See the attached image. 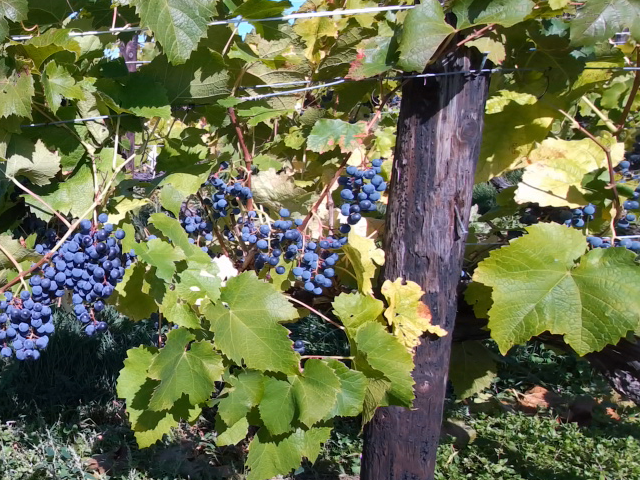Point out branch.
I'll use <instances>...</instances> for the list:
<instances>
[{"label":"branch","instance_id":"obj_7","mask_svg":"<svg viewBox=\"0 0 640 480\" xmlns=\"http://www.w3.org/2000/svg\"><path fill=\"white\" fill-rule=\"evenodd\" d=\"M250 66H251V63H250V62H247V63L243 66V68H242V70H241V72H240V74H239L238 78H237V79H236V81H235V84L233 85V87H232V88H231V90H230V95H231V96H234V95H235V93H236V91H237L238 87L240 86L241 82L243 81V79H244V77H245V74L247 73V70L249 69V67H250Z\"/></svg>","mask_w":640,"mask_h":480},{"label":"branch","instance_id":"obj_6","mask_svg":"<svg viewBox=\"0 0 640 480\" xmlns=\"http://www.w3.org/2000/svg\"><path fill=\"white\" fill-rule=\"evenodd\" d=\"M407 84H408V81L407 80H403V81L399 82L396 86H394L385 95L382 96V98L380 99V102L378 103V107L376 109V112H375L373 118L368 123V127L369 128H372L374 126V124L376 123V121L378 120L379 116L381 115V112H382L383 106L385 105L386 100L388 98H390L391 96H393L400 88L404 87Z\"/></svg>","mask_w":640,"mask_h":480},{"label":"branch","instance_id":"obj_1","mask_svg":"<svg viewBox=\"0 0 640 480\" xmlns=\"http://www.w3.org/2000/svg\"><path fill=\"white\" fill-rule=\"evenodd\" d=\"M138 155L137 151H133L131 155L127 156L117 167V169L114 171V173L110 176L107 184L105 185L104 189L101 191V193L99 194V196L95 199V201L91 204V206L81 215L79 216L74 222L73 224L70 226V228L65 232L63 238L58 241L54 247H52L47 254L45 255V257L39 261L37 264H34L33 266L29 267L26 271H23L21 273H19L18 275H16L12 281L8 282L7 284L3 285L2 287H0V293H3L4 291L8 290L9 288L15 286L19 280H21L22 278L31 275L32 272H34L35 270L39 269L41 266H43L44 264H46L48 262V260L50 259V257L58 251V248L61 247L62 245H64L67 240L69 239L70 235L73 233V231L77 228V226L80 224V222L84 221L86 219V217H88L90 215V213H92L95 208L97 207V205L101 202V200L104 198V196L109 192V189L111 188V185L113 184L114 180L117 178V176L121 173L122 169L129 163V161H132L134 158H136Z\"/></svg>","mask_w":640,"mask_h":480},{"label":"branch","instance_id":"obj_4","mask_svg":"<svg viewBox=\"0 0 640 480\" xmlns=\"http://www.w3.org/2000/svg\"><path fill=\"white\" fill-rule=\"evenodd\" d=\"M496 23L495 22H490L488 23L486 26L480 28V29H476L475 31H473L472 33L468 34L467 36H465L462 40H459L457 42H455L452 46H450L447 49H444L440 54H439V58L443 59L447 54L453 52L454 50H456L458 47L465 45L469 40H471L472 38H475L477 35L482 34L484 32H487L488 30H490L491 28L495 27Z\"/></svg>","mask_w":640,"mask_h":480},{"label":"branch","instance_id":"obj_2","mask_svg":"<svg viewBox=\"0 0 640 480\" xmlns=\"http://www.w3.org/2000/svg\"><path fill=\"white\" fill-rule=\"evenodd\" d=\"M557 112L565 119L568 121V123L574 128L577 129L579 132L583 133L584 135H586L597 147H599L601 150L605 151V159L607 162V167L609 170V184H610V189H611V193L612 196L614 198V201L616 203V213H615V217H614V224L618 225L619 224V220L622 218V204L620 201V198L618 196L617 190H616V186H615V181H614V168H613V164H612V151L605 146L603 143H601L595 136L592 135V133L587 130L586 128L582 127L580 124H577L575 122L574 119H572L571 116H569L562 108H558Z\"/></svg>","mask_w":640,"mask_h":480},{"label":"branch","instance_id":"obj_5","mask_svg":"<svg viewBox=\"0 0 640 480\" xmlns=\"http://www.w3.org/2000/svg\"><path fill=\"white\" fill-rule=\"evenodd\" d=\"M229 117H230L231 122L233 123L236 131H237V135H238V138L240 140V148H241L242 152L244 153L245 157H247L246 170L250 171L251 170V155L249 154V151L246 148L245 138H244V135L242 133L241 126H240L238 120L235 117L234 108L233 107L229 108Z\"/></svg>","mask_w":640,"mask_h":480},{"label":"branch","instance_id":"obj_3","mask_svg":"<svg viewBox=\"0 0 640 480\" xmlns=\"http://www.w3.org/2000/svg\"><path fill=\"white\" fill-rule=\"evenodd\" d=\"M352 157H353V153H352V152H349L348 154H346V155H344V156H343V158H342V160H341V162H340V164H339V167H338V169H337V172H336V174H335V175L330 179V182L327 184V188H326L325 192L323 193V195L321 196V198H320L319 200H317V201L313 204V206L309 209V211H308V212L306 213V215L304 216V218H303V224L299 227V230H300V231H304V230H305V229H304L305 223H306L307 219H309V217H310V215L312 214V212H315V211H316V209H317L320 205H322V204L325 202V200L328 198L329 194L331 193L332 187L334 186V183H335V182L340 178V176H341V174H342V172H343V169H344V167H345V165H346V162H347L350 158H352Z\"/></svg>","mask_w":640,"mask_h":480}]
</instances>
